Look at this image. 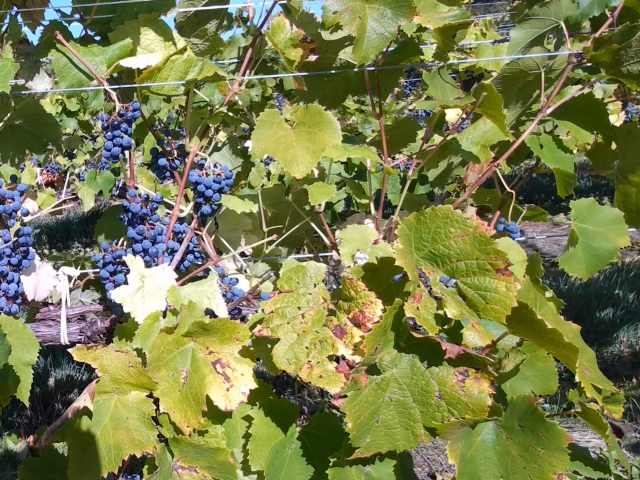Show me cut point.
Wrapping results in <instances>:
<instances>
[{"mask_svg":"<svg viewBox=\"0 0 640 480\" xmlns=\"http://www.w3.org/2000/svg\"><path fill=\"white\" fill-rule=\"evenodd\" d=\"M197 154H198V155H200V156H202V157H204V158L206 159V161H207V162H210V158H209V157H208V155H206L205 153H203V152L199 151Z\"/></svg>","mask_w":640,"mask_h":480,"instance_id":"deb38ca7","label":"cut point"},{"mask_svg":"<svg viewBox=\"0 0 640 480\" xmlns=\"http://www.w3.org/2000/svg\"><path fill=\"white\" fill-rule=\"evenodd\" d=\"M494 171L498 174L499 179H500V181H501V183H502V186L505 188V190H506V191H508L509 193H512V196H515V191H514V190H512V189H510V188L506 185L505 180H504V178H503V176H502V174H501V171H500L498 168H497V169H495Z\"/></svg>","mask_w":640,"mask_h":480,"instance_id":"6a23745f","label":"cut point"},{"mask_svg":"<svg viewBox=\"0 0 640 480\" xmlns=\"http://www.w3.org/2000/svg\"><path fill=\"white\" fill-rule=\"evenodd\" d=\"M105 89H106V91L108 90V92H109L110 94H112V95H113V98H114V100H115V103H118V98H117V96H116V93H115L113 90H111V89L109 88V86H108V87H105Z\"/></svg>","mask_w":640,"mask_h":480,"instance_id":"7d7e1d6f","label":"cut point"}]
</instances>
